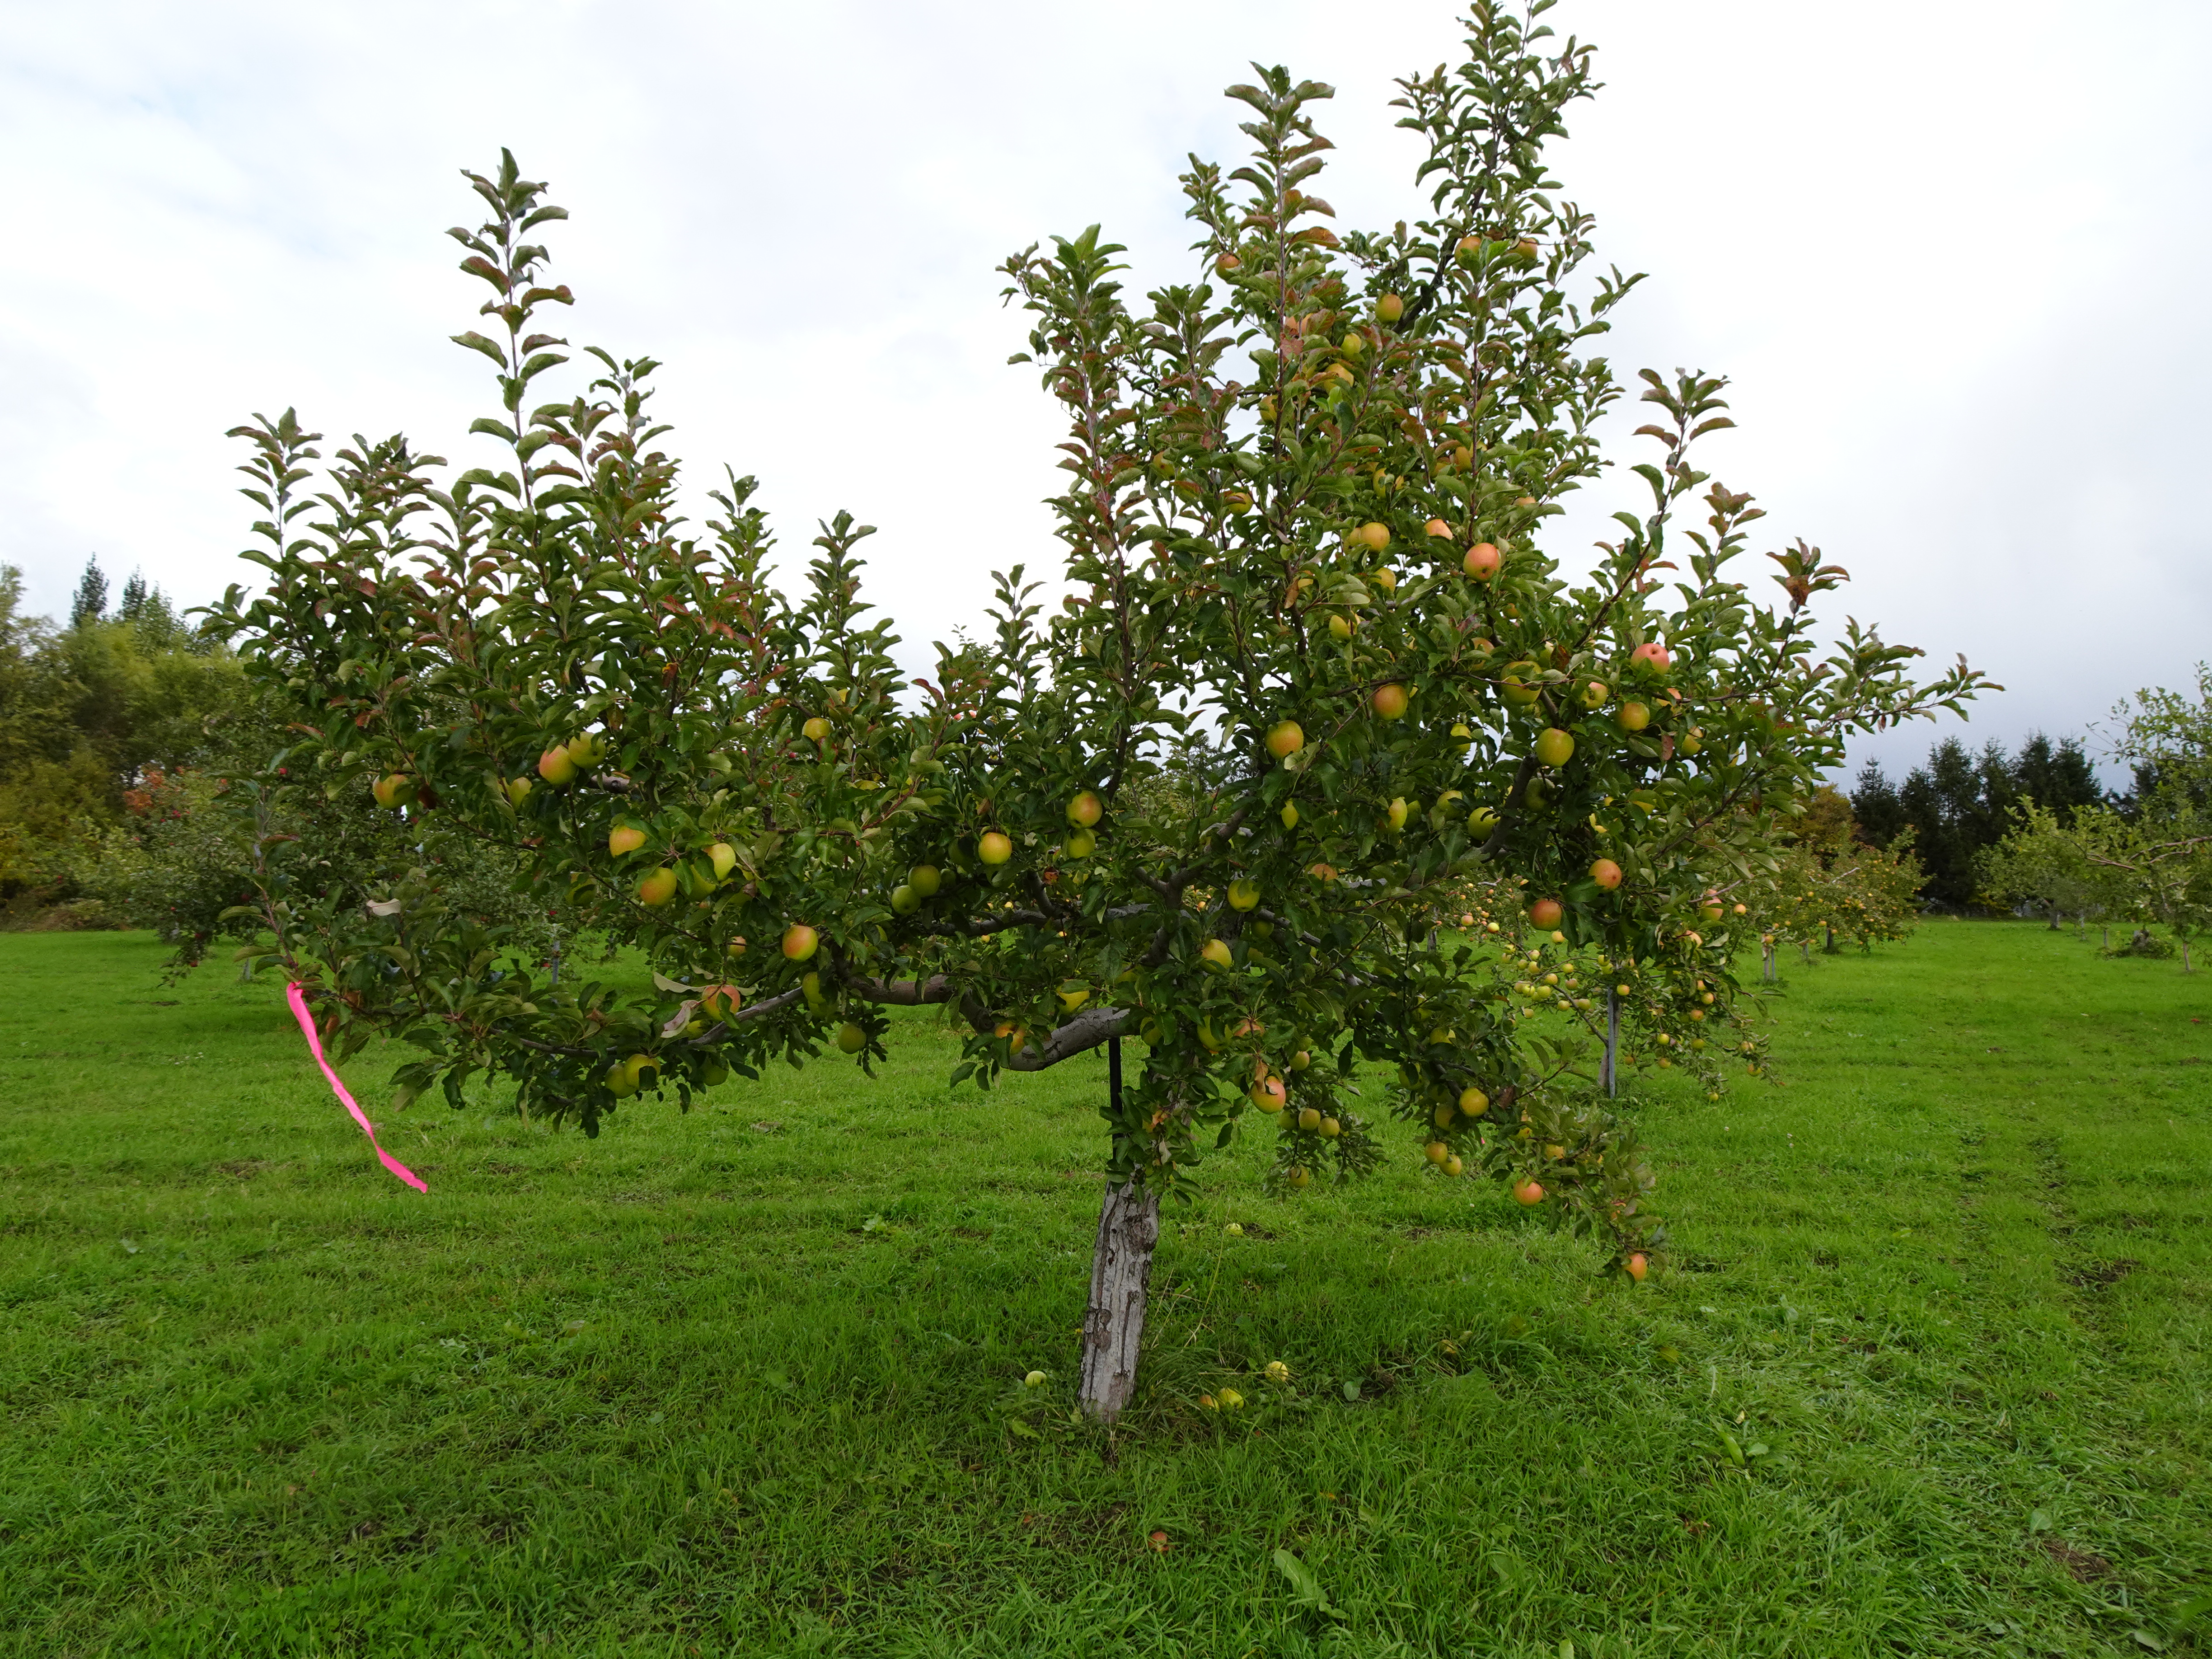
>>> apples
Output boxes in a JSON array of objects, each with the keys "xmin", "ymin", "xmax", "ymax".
[
  {"xmin": 1286, "ymin": 301, "xmax": 1317, "ymax": 338},
  {"xmin": 1619, "ymin": 1250, "xmax": 1649, "ymax": 1285},
  {"xmin": 1278, "ymin": 1106, "xmax": 1297, "ymax": 1132},
  {"xmin": 1258, "ymin": 395, "xmax": 1290, "ymax": 424},
  {"xmin": 1528, "ymin": 897, "xmax": 1564, "ymax": 933},
  {"xmin": 836, "ymin": 1020, "xmax": 871, "ymax": 1055},
  {"xmin": 849, "ymin": 924, "xmax": 887, "ymax": 960},
  {"xmin": 1265, "ymin": 719, "xmax": 1309, "ymax": 765},
  {"xmin": 568, "ymin": 731, "xmax": 610, "ymax": 771},
  {"xmin": 1507, "ymin": 1113, "xmax": 1533, "ymax": 1142},
  {"xmin": 1230, "ymin": 490, "xmax": 1254, "ymax": 518},
  {"xmin": 188, "ymin": 959, "xmax": 199, "ymax": 968},
  {"xmin": 1456, "ymin": 438, "xmax": 1492, "ymax": 475},
  {"xmin": 624, "ymin": 1051, "xmax": 663, "ymax": 1093},
  {"xmin": 1504, "ymin": 659, "xmax": 1545, "ymax": 709},
  {"xmin": 1436, "ymin": 790, "xmax": 1465, "ymax": 821},
  {"xmin": 697, "ymin": 898, "xmax": 715, "ymax": 915},
  {"xmin": 1609, "ymin": 1197, "xmax": 1639, "ymax": 1222},
  {"xmin": 608, "ymin": 813, "xmax": 656, "ymax": 862},
  {"xmin": 951, "ymin": 712, "xmax": 963, "ymax": 722},
  {"xmin": 1699, "ymin": 897, "xmax": 1726, "ymax": 924},
  {"xmin": 301, "ymin": 975, "xmax": 324, "ymax": 1000},
  {"xmin": 1585, "ymin": 856, "xmax": 1626, "ymax": 896},
  {"xmin": 374, "ymin": 768, "xmax": 415, "ymax": 812},
  {"xmin": 1232, "ymin": 1017, "xmax": 1267, "ymax": 1053},
  {"xmin": 1733, "ymin": 902, "xmax": 1750, "ymax": 919},
  {"xmin": 242, "ymin": 892, "xmax": 253, "ymax": 903},
  {"xmin": 1409, "ymin": 681, "xmax": 1430, "ymax": 704},
  {"xmin": 1289, "ymin": 1048, "xmax": 1310, "ymax": 1072},
  {"xmin": 686, "ymin": 1021, "xmax": 716, "ymax": 1045},
  {"xmin": 1299, "ymin": 1108, "xmax": 1321, "ymax": 1131},
  {"xmin": 1153, "ymin": 449, "xmax": 1185, "ymax": 479},
  {"xmin": 695, "ymin": 1055, "xmax": 730, "ymax": 1086},
  {"xmin": 1222, "ymin": 677, "xmax": 1247, "ymax": 702},
  {"xmin": 908, "ymin": 862, "xmax": 945, "ymax": 899},
  {"xmin": 1427, "ymin": 1142, "xmax": 1450, "ymax": 1165},
  {"xmin": 537, "ymin": 743, "xmax": 579, "ymax": 789},
  {"xmin": 602, "ymin": 1063, "xmax": 639, "ymax": 1099},
  {"xmin": 1706, "ymin": 885, "xmax": 1719, "ymax": 900},
  {"xmin": 1342, "ymin": 528, "xmax": 1371, "ymax": 563},
  {"xmin": 1654, "ymin": 684, "xmax": 1683, "ymax": 717},
  {"xmin": 1508, "ymin": 237, "xmax": 1538, "ymax": 269},
  {"xmin": 549, "ymin": 907, "xmax": 559, "ymax": 919},
  {"xmin": 983, "ymin": 900, "xmax": 994, "ymax": 913},
  {"xmin": 1671, "ymin": 720, "xmax": 1703, "ymax": 755},
  {"xmin": 1520, "ymin": 774, "xmax": 1561, "ymax": 819},
  {"xmin": 1533, "ymin": 726, "xmax": 1574, "ymax": 771},
  {"xmin": 1144, "ymin": 1110, "xmax": 1169, "ymax": 1136},
  {"xmin": 1588, "ymin": 811, "xmax": 1621, "ymax": 838},
  {"xmin": 993, "ymin": 1022, "xmax": 1030, "ymax": 1058},
  {"xmin": 1462, "ymin": 541, "xmax": 1502, "ymax": 584},
  {"xmin": 1372, "ymin": 790, "xmax": 1409, "ymax": 837},
  {"xmin": 1603, "ymin": 793, "xmax": 1620, "ymax": 811},
  {"xmin": 169, "ymin": 903, "xmax": 178, "ymax": 914},
  {"xmin": 701, "ymin": 983, "xmax": 743, "ymax": 1025},
  {"xmin": 939, "ymin": 866, "xmax": 960, "ymax": 890},
  {"xmin": 1459, "ymin": 638, "xmax": 1500, "ymax": 677},
  {"xmin": 947, "ymin": 835, "xmax": 983, "ymax": 868},
  {"xmin": 1625, "ymin": 787, "xmax": 1657, "ymax": 819},
  {"xmin": 1372, "ymin": 293, "xmax": 1406, "ymax": 326},
  {"xmin": 1677, "ymin": 931, "xmax": 1703, "ymax": 956},
  {"xmin": 1364, "ymin": 562, "xmax": 1398, "ymax": 599},
  {"xmin": 1359, "ymin": 521, "xmax": 1391, "ymax": 552},
  {"xmin": 1436, "ymin": 1099, "xmax": 1469, "ymax": 1133},
  {"xmin": 1503, "ymin": 601, "xmax": 1524, "ymax": 622},
  {"xmin": 978, "ymin": 830, "xmax": 1014, "ymax": 868},
  {"xmin": 803, "ymin": 969, "xmax": 841, "ymax": 1005},
  {"xmin": 1399, "ymin": 1057, "xmax": 1434, "ymax": 1093},
  {"xmin": 1330, "ymin": 332, "xmax": 1362, "ymax": 360},
  {"xmin": 1042, "ymin": 870, "xmax": 1061, "ymax": 893},
  {"xmin": 1308, "ymin": 371, "xmax": 1336, "ymax": 396},
  {"xmin": 1518, "ymin": 877, "xmax": 1531, "ymax": 891},
  {"xmin": 674, "ymin": 858, "xmax": 718, "ymax": 895},
  {"xmin": 853, "ymin": 958, "xmax": 881, "ymax": 986},
  {"xmin": 170, "ymin": 807, "xmax": 183, "ymax": 822},
  {"xmin": 1227, "ymin": 876, "xmax": 1263, "ymax": 914},
  {"xmin": 1515, "ymin": 1177, "xmax": 1544, "ymax": 1206},
  {"xmin": 1551, "ymin": 930, "xmax": 1569, "ymax": 947},
  {"xmin": 1544, "ymin": 1135, "xmax": 1571, "ymax": 1161},
  {"xmin": 1217, "ymin": 602, "xmax": 1246, "ymax": 634},
  {"xmin": 1323, "ymin": 359, "xmax": 1355, "ymax": 398},
  {"xmin": 1111, "ymin": 971, "xmax": 1145, "ymax": 998},
  {"xmin": 1420, "ymin": 516, "xmax": 1456, "ymax": 552},
  {"xmin": 1428, "ymin": 1021, "xmax": 1459, "ymax": 1057},
  {"xmin": 1056, "ymin": 977, "xmax": 1092, "ymax": 1017},
  {"xmin": 1500, "ymin": 784, "xmax": 1534, "ymax": 816},
  {"xmin": 506, "ymin": 776, "xmax": 537, "ymax": 814},
  {"xmin": 1181, "ymin": 638, "xmax": 1204, "ymax": 666},
  {"xmin": 275, "ymin": 764, "xmax": 291, "ymax": 780},
  {"xmin": 781, "ymin": 924, "xmax": 820, "ymax": 963},
  {"xmin": 1197, "ymin": 820, "xmax": 1234, "ymax": 858},
  {"xmin": 559, "ymin": 872, "xmax": 601, "ymax": 908},
  {"xmin": 725, "ymin": 935, "xmax": 748, "ymax": 959},
  {"xmin": 1762, "ymin": 934, "xmax": 1775, "ymax": 947},
  {"xmin": 904, "ymin": 773, "xmax": 929, "ymax": 799},
  {"xmin": 1198, "ymin": 1011, "xmax": 1233, "ymax": 1052},
  {"xmin": 1062, "ymin": 829, "xmax": 1096, "ymax": 862},
  {"xmin": 1081, "ymin": 634, "xmax": 1105, "ymax": 661},
  {"xmin": 1427, "ymin": 453, "xmax": 1458, "ymax": 482},
  {"xmin": 1447, "ymin": 725, "xmax": 1473, "ymax": 755},
  {"xmin": 704, "ymin": 841, "xmax": 738, "ymax": 883},
  {"xmin": 1370, "ymin": 682, "xmax": 1412, "ymax": 723},
  {"xmin": 1422, "ymin": 402, "xmax": 1449, "ymax": 428},
  {"xmin": 1404, "ymin": 995, "xmax": 1432, "ymax": 1026},
  {"xmin": 1266, "ymin": 622, "xmax": 1299, "ymax": 654},
  {"xmin": 1326, "ymin": 603, "xmax": 1362, "ymax": 645},
  {"xmin": 1616, "ymin": 697, "xmax": 1651, "ymax": 737},
  {"xmin": 1385, "ymin": 339, "xmax": 1416, "ymax": 363},
  {"xmin": 1572, "ymin": 671, "xmax": 1607, "ymax": 713},
  {"xmin": 890, "ymin": 884, "xmax": 925, "ymax": 917},
  {"xmin": 1401, "ymin": 630, "xmax": 1429, "ymax": 660},
  {"xmin": 1305, "ymin": 862, "xmax": 1339, "ymax": 896},
  {"xmin": 830, "ymin": 688, "xmax": 865, "ymax": 724},
  {"xmin": 1629, "ymin": 641, "xmax": 1672, "ymax": 686},
  {"xmin": 1215, "ymin": 250, "xmax": 1250, "ymax": 284},
  {"xmin": 1139, "ymin": 1010, "xmax": 1180, "ymax": 1047},
  {"xmin": 692, "ymin": 1041, "xmax": 721, "ymax": 1068},
  {"xmin": 1454, "ymin": 235, "xmax": 1491, "ymax": 270},
  {"xmin": 799, "ymin": 716, "xmax": 839, "ymax": 758},
  {"xmin": 1064, "ymin": 788, "xmax": 1104, "ymax": 832},
  {"xmin": 1510, "ymin": 495, "xmax": 1538, "ymax": 525},
  {"xmin": 637, "ymin": 866, "xmax": 679, "ymax": 910},
  {"xmin": 1439, "ymin": 1150, "xmax": 1464, "ymax": 1179},
  {"xmin": 1460, "ymin": 1086, "xmax": 1490, "ymax": 1118},
  {"xmin": 217, "ymin": 778, "xmax": 230, "ymax": 791},
  {"xmin": 981, "ymin": 934, "xmax": 992, "ymax": 945},
  {"xmin": 1056, "ymin": 929, "xmax": 1065, "ymax": 940},
  {"xmin": 1251, "ymin": 1073, "xmax": 1287, "ymax": 1115},
  {"xmin": 968, "ymin": 711, "xmax": 978, "ymax": 721},
  {"xmin": 1247, "ymin": 908, "xmax": 1277, "ymax": 938},
  {"xmin": 1583, "ymin": 1151, "xmax": 1602, "ymax": 1168},
  {"xmin": 1004, "ymin": 899, "xmax": 1017, "ymax": 910},
  {"xmin": 1074, "ymin": 866, "xmax": 1111, "ymax": 893},
  {"xmin": 343, "ymin": 990, "xmax": 363, "ymax": 1014},
  {"xmin": 1195, "ymin": 893, "xmax": 1214, "ymax": 911},
  {"xmin": 1193, "ymin": 937, "xmax": 1235, "ymax": 977},
  {"xmin": 1287, "ymin": 1164, "xmax": 1311, "ymax": 1188},
  {"xmin": 1467, "ymin": 806, "xmax": 1503, "ymax": 840},
  {"xmin": 1318, "ymin": 1117, "xmax": 1342, "ymax": 1138},
  {"xmin": 1373, "ymin": 467, "xmax": 1409, "ymax": 500},
  {"xmin": 2191, "ymin": 1016, "xmax": 2204, "ymax": 1027},
  {"xmin": 809, "ymin": 988, "xmax": 848, "ymax": 1021},
  {"xmin": 194, "ymin": 930, "xmax": 205, "ymax": 944}
]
